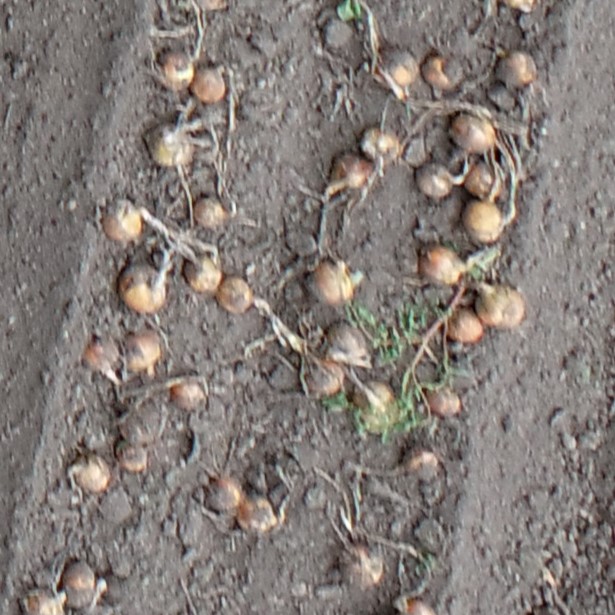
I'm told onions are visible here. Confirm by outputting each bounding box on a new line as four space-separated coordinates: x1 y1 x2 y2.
461 200 500 240
27 588 62 614
69 456 111 494
79 337 119 368
449 312 481 342
495 51 535 88
214 277 251 315
203 471 240 511
474 283 523 328
399 597 434 615
325 324 368 368
305 360 341 393
415 162 454 196
79 408 116 449
187 69 225 103
329 152 374 196
59 562 95 604
185 256 220 292
157 53 192 88
193 196 226 228
167 375 206 411
119 405 165 440
362 127 398 161
342 541 387 590
309 260 359 304
403 448 443 483
375 54 418 94
451 113 495 153
116 443 147 473
117 263 166 311
237 495 276 533
502 0 537 9
355 380 394 421
419 244 463 285
123 330 163 372
149 125 190 166
424 388 459 416
421 52 454 90
189 0 227 10
462 160 495 195
100 203 142 242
